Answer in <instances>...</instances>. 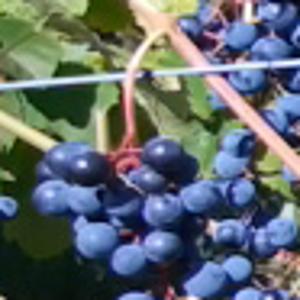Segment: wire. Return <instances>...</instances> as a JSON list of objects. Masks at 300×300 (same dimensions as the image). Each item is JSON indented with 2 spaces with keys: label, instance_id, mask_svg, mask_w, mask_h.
<instances>
[{
  "label": "wire",
  "instance_id": "obj_1",
  "mask_svg": "<svg viewBox=\"0 0 300 300\" xmlns=\"http://www.w3.org/2000/svg\"><path fill=\"white\" fill-rule=\"evenodd\" d=\"M287 67H300V59L222 63V64L146 69V70H140L138 72H135V75L137 79H139V78L207 73V72H223V71H239V70H252V69H264V68H287Z\"/></svg>",
  "mask_w": 300,
  "mask_h": 300
},
{
  "label": "wire",
  "instance_id": "obj_2",
  "mask_svg": "<svg viewBox=\"0 0 300 300\" xmlns=\"http://www.w3.org/2000/svg\"><path fill=\"white\" fill-rule=\"evenodd\" d=\"M124 74L125 72H106V73H99V74H92V75L42 79V80H32V81L1 82L0 91L122 81Z\"/></svg>",
  "mask_w": 300,
  "mask_h": 300
}]
</instances>
